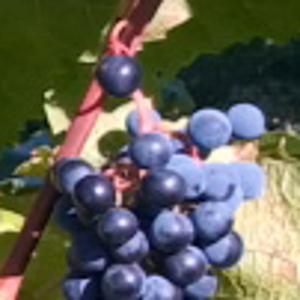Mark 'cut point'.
<instances>
[{
	"label": "cut point",
	"mask_w": 300,
	"mask_h": 300,
	"mask_svg": "<svg viewBox=\"0 0 300 300\" xmlns=\"http://www.w3.org/2000/svg\"><path fill=\"white\" fill-rule=\"evenodd\" d=\"M133 107H137L141 112V130L143 132H153L155 130V124L153 123V116L151 115V109L148 101L142 95L140 89L133 91Z\"/></svg>",
	"instance_id": "obj_1"
},
{
	"label": "cut point",
	"mask_w": 300,
	"mask_h": 300,
	"mask_svg": "<svg viewBox=\"0 0 300 300\" xmlns=\"http://www.w3.org/2000/svg\"><path fill=\"white\" fill-rule=\"evenodd\" d=\"M127 24L128 18L121 16L115 24L110 36V46L115 54H122L123 56H129L131 54V49L125 43H120L121 35Z\"/></svg>",
	"instance_id": "obj_2"
}]
</instances>
